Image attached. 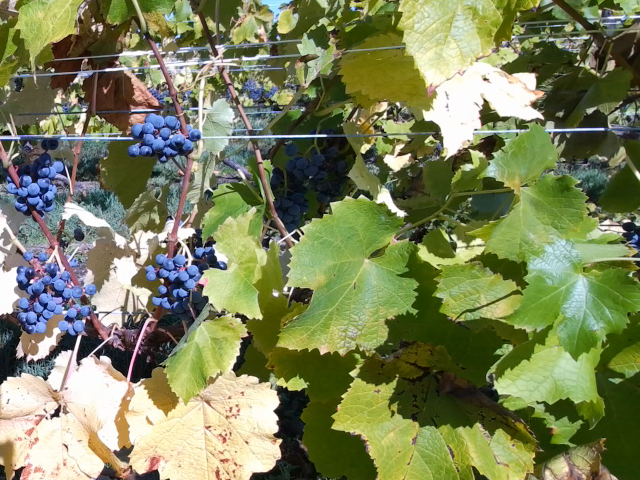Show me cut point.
Segmentation results:
<instances>
[{
	"mask_svg": "<svg viewBox=\"0 0 640 480\" xmlns=\"http://www.w3.org/2000/svg\"><path fill=\"white\" fill-rule=\"evenodd\" d=\"M54 257H55V259L57 260V263L59 264V266H60V268H61V271H65V269H64V268L62 267V265H61L60 258H59V256H58L57 252H55V251H53V252L51 253V255L48 257V259L45 261V264L50 263V262H51V260H52Z\"/></svg>",
	"mask_w": 640,
	"mask_h": 480,
	"instance_id": "2",
	"label": "cut point"
},
{
	"mask_svg": "<svg viewBox=\"0 0 640 480\" xmlns=\"http://www.w3.org/2000/svg\"><path fill=\"white\" fill-rule=\"evenodd\" d=\"M177 242L181 245L179 247V249L177 250V254H180L181 251H182V255H185V252H186L187 253V259H188V264H191V252H190L189 248L178 237H177Z\"/></svg>",
	"mask_w": 640,
	"mask_h": 480,
	"instance_id": "1",
	"label": "cut point"
}]
</instances>
